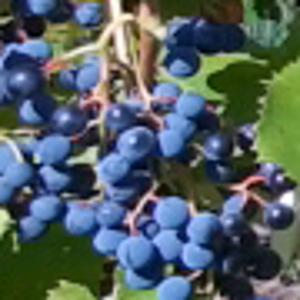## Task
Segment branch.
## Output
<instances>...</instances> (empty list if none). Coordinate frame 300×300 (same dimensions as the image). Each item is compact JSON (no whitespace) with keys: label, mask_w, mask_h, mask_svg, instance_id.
<instances>
[{"label":"branch","mask_w":300,"mask_h":300,"mask_svg":"<svg viewBox=\"0 0 300 300\" xmlns=\"http://www.w3.org/2000/svg\"><path fill=\"white\" fill-rule=\"evenodd\" d=\"M141 38L138 64V87L149 93L155 87L156 59L159 53L157 1L141 0L138 12Z\"/></svg>","instance_id":"obj_1"}]
</instances>
